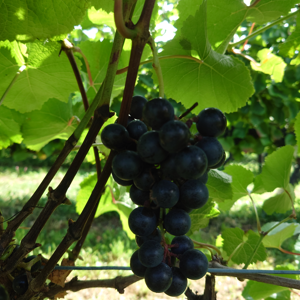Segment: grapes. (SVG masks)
<instances>
[{
  "instance_id": "01657485",
  "label": "grapes",
  "mask_w": 300,
  "mask_h": 300,
  "mask_svg": "<svg viewBox=\"0 0 300 300\" xmlns=\"http://www.w3.org/2000/svg\"><path fill=\"white\" fill-rule=\"evenodd\" d=\"M196 127L192 134L185 122L175 120L168 99L134 95L127 127L117 119L101 132L103 145L113 154L112 177L130 186L137 206L128 218L140 247L131 256L130 269L151 291L170 297L181 295L188 279L208 271L207 256L185 235L191 226L188 213L207 203L208 172L226 160L216 139L226 130L225 114L205 108Z\"/></svg>"
}]
</instances>
